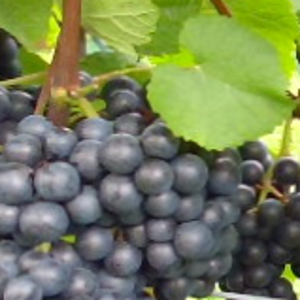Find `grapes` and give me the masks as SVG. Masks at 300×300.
Masks as SVG:
<instances>
[{"mask_svg":"<svg viewBox=\"0 0 300 300\" xmlns=\"http://www.w3.org/2000/svg\"><path fill=\"white\" fill-rule=\"evenodd\" d=\"M181 147L165 118L140 112L76 129L23 118L0 166L2 298L210 296L253 188L231 157L210 168Z\"/></svg>","mask_w":300,"mask_h":300,"instance_id":"grapes-1","label":"grapes"}]
</instances>
